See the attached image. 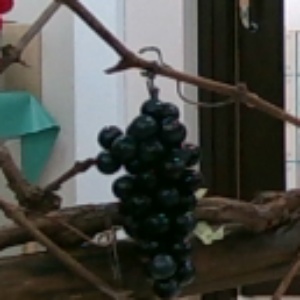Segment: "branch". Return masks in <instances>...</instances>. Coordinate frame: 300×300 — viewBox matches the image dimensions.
<instances>
[{
    "instance_id": "2",
    "label": "branch",
    "mask_w": 300,
    "mask_h": 300,
    "mask_svg": "<svg viewBox=\"0 0 300 300\" xmlns=\"http://www.w3.org/2000/svg\"><path fill=\"white\" fill-rule=\"evenodd\" d=\"M0 208L6 218H11L16 224L28 231L34 238L38 239L44 247L53 252L68 265L70 269L82 276L89 284L101 290L113 300H127V296L124 293L117 291L113 286L95 276L88 268L78 263L75 258L67 253L59 244L36 229L31 221L24 215V211L21 207L10 204L6 197H1Z\"/></svg>"
},
{
    "instance_id": "1",
    "label": "branch",
    "mask_w": 300,
    "mask_h": 300,
    "mask_svg": "<svg viewBox=\"0 0 300 300\" xmlns=\"http://www.w3.org/2000/svg\"><path fill=\"white\" fill-rule=\"evenodd\" d=\"M64 5L76 13L95 33L104 40L120 57L121 60L111 68L106 69V73L125 71L129 68H151L156 74L172 78L177 81L198 85L211 92L230 95L238 98L241 102L253 105L259 109L278 117L279 119L300 126V119H297L280 106L273 104L260 95L249 91L245 82L237 85H228L206 77L193 76L172 69L170 66L157 61H146L140 59L124 43H122L109 29H107L99 19L92 14L79 0H53L38 19L29 27L15 46L7 44L2 48V58L0 59V72H3L10 63H17L21 59V52L30 43L47 22L55 15L61 6Z\"/></svg>"
}]
</instances>
